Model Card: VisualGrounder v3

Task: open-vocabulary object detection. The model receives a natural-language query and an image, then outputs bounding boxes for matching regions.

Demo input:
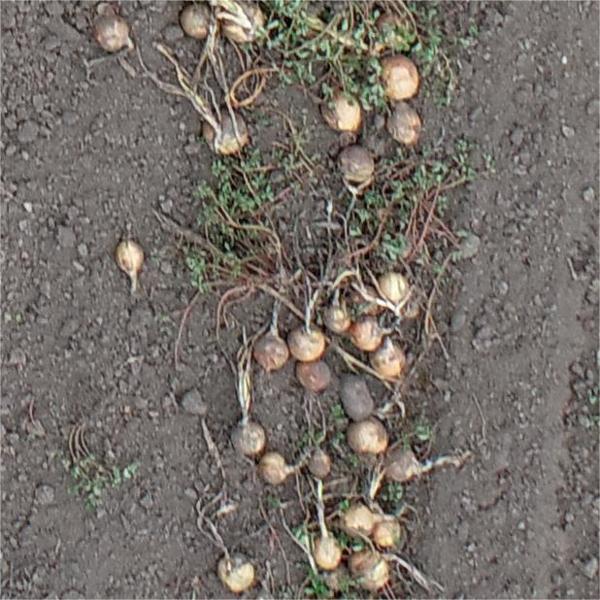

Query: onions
[287,324,325,360]
[388,450,418,482]
[345,392,375,422]
[341,500,378,538]
[217,556,255,591]
[370,339,406,379]
[252,334,288,371]
[348,285,379,315]
[92,14,129,54]
[374,270,409,304]
[311,534,343,569]
[176,6,210,39]
[222,8,262,43]
[370,520,403,552]
[306,450,333,476]
[349,318,380,347]
[204,112,245,153]
[337,376,369,405]
[383,104,420,141]
[338,145,374,183]
[321,565,350,592]
[377,54,419,99]
[294,359,332,393]
[230,420,267,458]
[257,452,286,484]
[404,300,419,318]
[347,553,387,589]
[325,306,351,331]
[376,13,414,48]
[323,91,364,129]
[346,417,386,454]
[114,242,145,272]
